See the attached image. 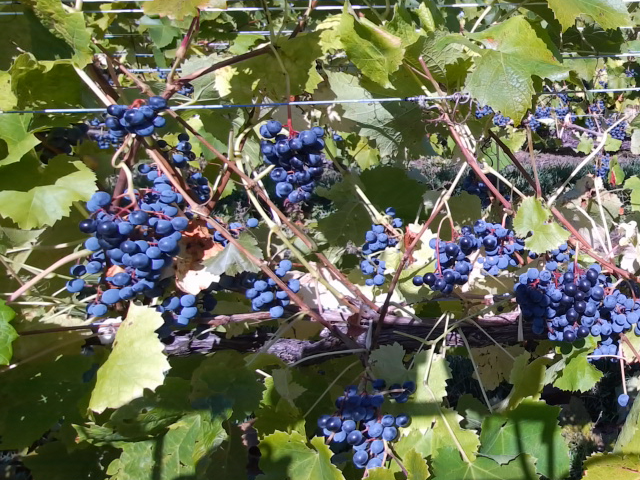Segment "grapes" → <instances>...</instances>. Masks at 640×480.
I'll use <instances>...</instances> for the list:
<instances>
[{
    "mask_svg": "<svg viewBox=\"0 0 640 480\" xmlns=\"http://www.w3.org/2000/svg\"><path fill=\"white\" fill-rule=\"evenodd\" d=\"M195 295H182L178 297H168L163 300V305L157 307V311L164 313L166 310L173 311L178 310L177 319L173 322L175 327H186L189 322V318H193L198 312L196 306Z\"/></svg>",
    "mask_w": 640,
    "mask_h": 480,
    "instance_id": "e5b3c951",
    "label": "grapes"
},
{
    "mask_svg": "<svg viewBox=\"0 0 640 480\" xmlns=\"http://www.w3.org/2000/svg\"><path fill=\"white\" fill-rule=\"evenodd\" d=\"M371 261L379 267L375 269V267L370 265V262L366 260L360 262L361 273L363 275H373V278L365 279L364 284L366 286H383L385 284V277L382 274L387 269V263L377 259L376 257H372Z\"/></svg>",
    "mask_w": 640,
    "mask_h": 480,
    "instance_id": "ef6de9ee",
    "label": "grapes"
},
{
    "mask_svg": "<svg viewBox=\"0 0 640 480\" xmlns=\"http://www.w3.org/2000/svg\"><path fill=\"white\" fill-rule=\"evenodd\" d=\"M364 239L367 242L361 248L364 255H370L373 251L384 250L386 247L394 246L398 243L397 238H389L382 224H371L370 230H367L364 235Z\"/></svg>",
    "mask_w": 640,
    "mask_h": 480,
    "instance_id": "2adb6a1f",
    "label": "grapes"
},
{
    "mask_svg": "<svg viewBox=\"0 0 640 480\" xmlns=\"http://www.w3.org/2000/svg\"><path fill=\"white\" fill-rule=\"evenodd\" d=\"M190 179L194 182H197V184L199 185V190L201 192H206L208 190V179L206 177H203L201 173L192 172L190 174Z\"/></svg>",
    "mask_w": 640,
    "mask_h": 480,
    "instance_id": "54f908b8",
    "label": "grapes"
},
{
    "mask_svg": "<svg viewBox=\"0 0 640 480\" xmlns=\"http://www.w3.org/2000/svg\"><path fill=\"white\" fill-rule=\"evenodd\" d=\"M166 100L163 97L150 96L147 105L139 109H129L127 105L110 104L105 120L108 132L113 137H127L129 133H136L141 137H150L156 127L166 123L164 116H157L156 109H164Z\"/></svg>",
    "mask_w": 640,
    "mask_h": 480,
    "instance_id": "5460f4e3",
    "label": "grapes"
},
{
    "mask_svg": "<svg viewBox=\"0 0 640 480\" xmlns=\"http://www.w3.org/2000/svg\"><path fill=\"white\" fill-rule=\"evenodd\" d=\"M569 248L563 243L559 249L551 250L553 260L545 262V269L529 268L526 274L519 276V282L513 285V291L522 294L530 283L537 278L540 292H545L539 303L546 307V315L552 319L546 323L547 337L550 341H575L585 338L590 333L593 336L603 335L600 344L596 346L591 356H609L617 353V344L613 341V333L628 331L636 325L634 335L640 337V299H629L620 290L612 295L605 294L612 284L605 274H601V266L593 263L579 278L573 273L576 266L574 261L568 263L567 270L557 280L551 279L553 271L558 270V262L569 260L563 252ZM565 305L568 312L562 316L558 306Z\"/></svg>",
    "mask_w": 640,
    "mask_h": 480,
    "instance_id": "b958b902",
    "label": "grapes"
},
{
    "mask_svg": "<svg viewBox=\"0 0 640 480\" xmlns=\"http://www.w3.org/2000/svg\"><path fill=\"white\" fill-rule=\"evenodd\" d=\"M245 281L253 284L252 289H246L244 291L245 297L252 301L251 309L253 311H261L266 307V304L274 302L277 299L281 305L271 306L269 308V314L273 320L280 319L285 313L286 307L291 304V300L280 289L275 292V295L272 291H266L269 287L276 285L274 281L268 277L262 279L255 272H249L245 276Z\"/></svg>",
    "mask_w": 640,
    "mask_h": 480,
    "instance_id": "83cd7487",
    "label": "grapes"
},
{
    "mask_svg": "<svg viewBox=\"0 0 640 480\" xmlns=\"http://www.w3.org/2000/svg\"><path fill=\"white\" fill-rule=\"evenodd\" d=\"M439 265L441 273L427 272L412 279L414 286L427 284L433 290L451 294L453 286H463L469 281V272L473 265L466 259L484 245L486 260L477 259L483 264L480 274L483 277L497 276L499 269H508L519 264L513 253L524 249V240L516 237L514 230L505 229L501 223L478 219L472 226L464 225L457 242L446 243L439 240Z\"/></svg>",
    "mask_w": 640,
    "mask_h": 480,
    "instance_id": "0513c4c2",
    "label": "grapes"
},
{
    "mask_svg": "<svg viewBox=\"0 0 640 480\" xmlns=\"http://www.w3.org/2000/svg\"><path fill=\"white\" fill-rule=\"evenodd\" d=\"M139 170L146 176V181L152 186L144 198L138 201L142 211H132L128 220L116 219L106 212H98L92 218L83 219L79 224L82 233L95 236L84 241V250L92 252L85 265H74L69 268L71 275H95L103 272L105 266L122 265L127 271L118 272L106 278L108 285L123 286L121 289H106L101 295L100 302H89L86 312L95 317H103L108 312V306L114 302L131 300L135 294L144 289H153L156 280L161 275V269L172 266V257L179 252V241L182 234L191 227V219L186 216H176L178 208L184 199L174 192L168 182L155 166L141 163ZM159 212L170 221L151 216L148 212ZM151 228L156 237V247H150L144 240L127 241L126 236L133 233V229Z\"/></svg>",
    "mask_w": 640,
    "mask_h": 480,
    "instance_id": "01657485",
    "label": "grapes"
},
{
    "mask_svg": "<svg viewBox=\"0 0 640 480\" xmlns=\"http://www.w3.org/2000/svg\"><path fill=\"white\" fill-rule=\"evenodd\" d=\"M282 124L277 120L267 121L258 128V133L265 138H273L274 144L269 140L260 142L263 160L267 165H276L269 170V178L276 183L273 186L274 194L279 199H288L293 204H299L301 200H310L312 190L317 187V181L313 176H320L323 167L320 156L315 154L324 147L321 138L325 131L321 127H313L302 130L297 138H287L278 133ZM306 152V163L301 160V150Z\"/></svg>",
    "mask_w": 640,
    "mask_h": 480,
    "instance_id": "f8a65327",
    "label": "grapes"
},
{
    "mask_svg": "<svg viewBox=\"0 0 640 480\" xmlns=\"http://www.w3.org/2000/svg\"><path fill=\"white\" fill-rule=\"evenodd\" d=\"M385 401L383 394L363 395L358 392L356 384L345 387L343 397L335 400V406L342 410V415L333 417L324 414L317 419V425L322 430L324 437H330L335 445H341L345 440L354 448L353 463L357 469L372 470L380 467L384 461V444L379 439H374L370 445L368 438L361 431L355 429L356 423L364 421L369 427L366 435L370 438L382 437L385 441H393L397 436L396 427H404L410 421L406 413H399L396 417L392 413H386L380 423L377 422L376 410Z\"/></svg>",
    "mask_w": 640,
    "mask_h": 480,
    "instance_id": "84f90ec7",
    "label": "grapes"
},
{
    "mask_svg": "<svg viewBox=\"0 0 640 480\" xmlns=\"http://www.w3.org/2000/svg\"><path fill=\"white\" fill-rule=\"evenodd\" d=\"M214 239L216 241L221 242L223 247H226L229 244V241L226 238L222 237V234L219 231H214L213 232L212 240H214Z\"/></svg>",
    "mask_w": 640,
    "mask_h": 480,
    "instance_id": "91a60905",
    "label": "grapes"
},
{
    "mask_svg": "<svg viewBox=\"0 0 640 480\" xmlns=\"http://www.w3.org/2000/svg\"><path fill=\"white\" fill-rule=\"evenodd\" d=\"M402 388L404 392H393L391 394V397L395 399L398 404H404L409 399V395H412L415 391V384L412 381L405 380Z\"/></svg>",
    "mask_w": 640,
    "mask_h": 480,
    "instance_id": "1ff8f66d",
    "label": "grapes"
}]
</instances>
